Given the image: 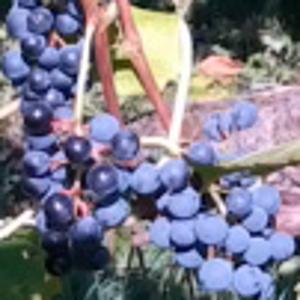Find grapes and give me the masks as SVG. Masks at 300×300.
Segmentation results:
<instances>
[{
  "mask_svg": "<svg viewBox=\"0 0 300 300\" xmlns=\"http://www.w3.org/2000/svg\"><path fill=\"white\" fill-rule=\"evenodd\" d=\"M57 15L38 0H14L5 28L21 51L0 59V72L17 91L19 112L26 130L22 155L24 191L42 206L36 211L41 249L50 252L47 270L65 274L71 248L103 269L109 253L102 245L104 231L122 227L132 216V199L154 198L158 215L150 226V244L171 249L175 264L195 269V287L202 294L228 291L242 299L277 300L276 286L262 268L284 263L296 251L292 231L276 228L273 216L283 196L272 182H257L253 173L228 171L218 184L228 189L222 206L238 221L228 224L216 213L203 214L204 194L188 186V168L212 167L222 159L214 144L226 142L231 131L247 132L258 123L250 102L236 103L224 113L211 112L203 124L205 141L186 149L184 160L174 159L156 168L139 162L141 139L122 128L109 114H99L88 125V137L63 139L52 131L54 118L71 120L80 48L73 38L83 30L82 9L66 2Z\"/></svg>",
  "mask_w": 300,
  "mask_h": 300,
  "instance_id": "1",
  "label": "grapes"
}]
</instances>
